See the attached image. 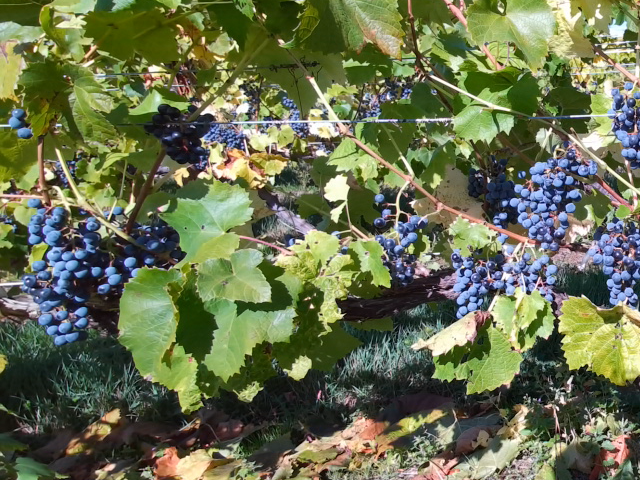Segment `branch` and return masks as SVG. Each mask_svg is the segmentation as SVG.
<instances>
[{
  "label": "branch",
  "instance_id": "10",
  "mask_svg": "<svg viewBox=\"0 0 640 480\" xmlns=\"http://www.w3.org/2000/svg\"><path fill=\"white\" fill-rule=\"evenodd\" d=\"M593 180L598 182L599 184H601L608 192L611 193V195L618 201H620L621 203H623L625 206H627L629 211L633 210V205L626 200L624 197H622L621 195H619L605 180H603L602 178H600L597 175L593 176Z\"/></svg>",
  "mask_w": 640,
  "mask_h": 480
},
{
  "label": "branch",
  "instance_id": "7",
  "mask_svg": "<svg viewBox=\"0 0 640 480\" xmlns=\"http://www.w3.org/2000/svg\"><path fill=\"white\" fill-rule=\"evenodd\" d=\"M284 53L298 66L301 76L311 85L314 95L321 103L323 109L332 119H339V115L331 108L328 100L323 96L318 83L308 74L304 62L290 49L286 48Z\"/></svg>",
  "mask_w": 640,
  "mask_h": 480
},
{
  "label": "branch",
  "instance_id": "13",
  "mask_svg": "<svg viewBox=\"0 0 640 480\" xmlns=\"http://www.w3.org/2000/svg\"><path fill=\"white\" fill-rule=\"evenodd\" d=\"M561 247L562 248H566V249L571 250V251H580V252H583V253L587 252V248L586 247L574 246V245H570L568 243H562Z\"/></svg>",
  "mask_w": 640,
  "mask_h": 480
},
{
  "label": "branch",
  "instance_id": "1",
  "mask_svg": "<svg viewBox=\"0 0 640 480\" xmlns=\"http://www.w3.org/2000/svg\"><path fill=\"white\" fill-rule=\"evenodd\" d=\"M336 127L338 128V130L348 140H350L354 144H356L370 158H372L373 160L378 162L381 166H383L384 168L389 170L391 173H393L399 179H402L404 182H407L410 185H412L419 193H421L422 195L428 197L440 210H443L444 212H448V213L454 214V215H456V216H458V217H460L462 219L467 220L468 222H470L471 224H474L476 226L485 227L489 231H492L497 235L499 233H506L509 236L510 239L519 240L521 243L527 242L530 245H536L538 247L542 246V243L540 241H538V240H532L530 237H525L521 233L512 232V231L505 230V229H500L499 227H497L496 225L490 223L487 220L478 219V218L470 215L469 213L464 212V211H462V210H460V209H458L456 207L444 204L442 201H440V199L432 191L424 188L421 184H419L415 178H412L411 176L406 175L404 172H402L401 170L397 169L393 164L389 163L384 158H382L379 154L374 152L364 142H362L357 136L352 134L344 126V124H336Z\"/></svg>",
  "mask_w": 640,
  "mask_h": 480
},
{
  "label": "branch",
  "instance_id": "4",
  "mask_svg": "<svg viewBox=\"0 0 640 480\" xmlns=\"http://www.w3.org/2000/svg\"><path fill=\"white\" fill-rule=\"evenodd\" d=\"M51 138L54 140V144H55V150L57 151V156L62 164V168L63 171L66 174V178L68 179L69 183L72 186L73 191L75 192V196L77 197V199L81 202V204L83 205L84 208L87 209V211L93 216L95 217L96 220H98L100 223H102L104 226H106L107 228L111 229L115 234H117L122 240L130 243L131 245H134L136 247H140L141 243L139 241H136L134 239H132L131 237L126 236L124 233H122L121 230H119L116 226H114L113 224H111L110 222L106 221L102 216H100L97 212H95L92 207L86 202V200L84 199V197L82 196V194L80 193V190L77 187L76 182L74 181L71 172L67 166V162L62 154V149L60 148V142H59V138L56 134H52Z\"/></svg>",
  "mask_w": 640,
  "mask_h": 480
},
{
  "label": "branch",
  "instance_id": "6",
  "mask_svg": "<svg viewBox=\"0 0 640 480\" xmlns=\"http://www.w3.org/2000/svg\"><path fill=\"white\" fill-rule=\"evenodd\" d=\"M167 159V155L165 153H162L157 162L154 164V166L150 169V172L145 176L144 178V183L143 186L141 188V191L138 195V197L136 198V200L134 201V204L132 206V211H131V217L129 220V223L127 224V227L125 229V233L127 235H130L133 232V229L137 223V219H138V213H139V208L141 206V203L144 201L148 190L150 188L151 185V181L154 178V176L157 174V171L161 168V166L164 164V162Z\"/></svg>",
  "mask_w": 640,
  "mask_h": 480
},
{
  "label": "branch",
  "instance_id": "5",
  "mask_svg": "<svg viewBox=\"0 0 640 480\" xmlns=\"http://www.w3.org/2000/svg\"><path fill=\"white\" fill-rule=\"evenodd\" d=\"M536 124H544L551 127V130L554 131V136L559 137L560 139L568 140L569 137L578 143L583 149H585L589 154H591L596 162L600 165L601 168L606 170L608 173L613 175L619 181L623 182L626 186H628L633 192H635L638 196H640V189H638L635 185H633L628 179L621 176L617 171L610 168L606 165L603 160L599 157V155L587 144H585L580 138H578L572 131L563 128L559 124H555L550 120H535Z\"/></svg>",
  "mask_w": 640,
  "mask_h": 480
},
{
  "label": "branch",
  "instance_id": "11",
  "mask_svg": "<svg viewBox=\"0 0 640 480\" xmlns=\"http://www.w3.org/2000/svg\"><path fill=\"white\" fill-rule=\"evenodd\" d=\"M446 4L450 7V9L452 10L453 14L458 17L459 21L463 24L467 23V19L466 16L464 15V13L459 9L456 8L454 3L451 2L450 0L446 1Z\"/></svg>",
  "mask_w": 640,
  "mask_h": 480
},
{
  "label": "branch",
  "instance_id": "12",
  "mask_svg": "<svg viewBox=\"0 0 640 480\" xmlns=\"http://www.w3.org/2000/svg\"><path fill=\"white\" fill-rule=\"evenodd\" d=\"M483 50L485 51V53L487 54V58L492 62V64L498 69L501 70L502 69V65L495 59L494 56H492V52L489 49L488 46H484Z\"/></svg>",
  "mask_w": 640,
  "mask_h": 480
},
{
  "label": "branch",
  "instance_id": "3",
  "mask_svg": "<svg viewBox=\"0 0 640 480\" xmlns=\"http://www.w3.org/2000/svg\"><path fill=\"white\" fill-rule=\"evenodd\" d=\"M272 39H277L279 44L284 42V37L277 32L276 30H272L270 33L266 34L260 42L258 48L252 51L246 58H244L238 66L234 68L228 75L227 78L223 80L221 84H219L212 93L205 99V101L192 113L187 117L189 122H193L197 117H199L210 105L211 103L219 96V94L234 80V78L249 64L251 63L258 55H260L267 44Z\"/></svg>",
  "mask_w": 640,
  "mask_h": 480
},
{
  "label": "branch",
  "instance_id": "9",
  "mask_svg": "<svg viewBox=\"0 0 640 480\" xmlns=\"http://www.w3.org/2000/svg\"><path fill=\"white\" fill-rule=\"evenodd\" d=\"M593 50L596 51L597 53L601 54L603 57H605L606 60L611 63V66L616 68L621 74L627 75V77L630 80H632L636 84L640 85L639 77L637 75H635L634 73H632L631 71H629L628 68L625 65H623L622 63H620L617 60H614L605 50H603L602 48H599L598 46H594Z\"/></svg>",
  "mask_w": 640,
  "mask_h": 480
},
{
  "label": "branch",
  "instance_id": "8",
  "mask_svg": "<svg viewBox=\"0 0 640 480\" xmlns=\"http://www.w3.org/2000/svg\"><path fill=\"white\" fill-rule=\"evenodd\" d=\"M43 148H44V139L42 137H39L37 139V146H36L37 169L40 177V185L42 189L44 202L47 205H51L53 203V200L51 199L49 186L47 183V174L45 171L44 160H43Z\"/></svg>",
  "mask_w": 640,
  "mask_h": 480
},
{
  "label": "branch",
  "instance_id": "2",
  "mask_svg": "<svg viewBox=\"0 0 640 480\" xmlns=\"http://www.w3.org/2000/svg\"><path fill=\"white\" fill-rule=\"evenodd\" d=\"M406 4L408 6V11H409V24H410L411 31H412V36H413V41H414V48L416 49V54H417V65L421 69V71L424 73V75L427 77L429 82L431 83V86L434 89V91L436 92V95H437L440 103L446 108V110L448 111L449 114L453 113V109L447 103V101L444 99V97H443V95L441 93V90L437 86L436 82H439L441 84L447 85L452 89H456V90H458V92L473 98L477 103L485 105V106H487V107H489V108H491L493 110H496V111H499V112H507L509 114H515V115L520 116L521 118H528V116H529L528 113H524L523 111L517 110V109H511L509 107H501V106L495 105V104H493V103H491V102H489V101H487V100H485L483 98H480L476 94L470 93L466 89H462V88H460L458 86H454V85L446 82L443 78L438 77L434 73L430 74L429 71L427 70V68L425 67V65L422 63V52H421V47L419 45V39H418L416 25H415V22H414L413 4H412L411 0H406Z\"/></svg>",
  "mask_w": 640,
  "mask_h": 480
}]
</instances>
